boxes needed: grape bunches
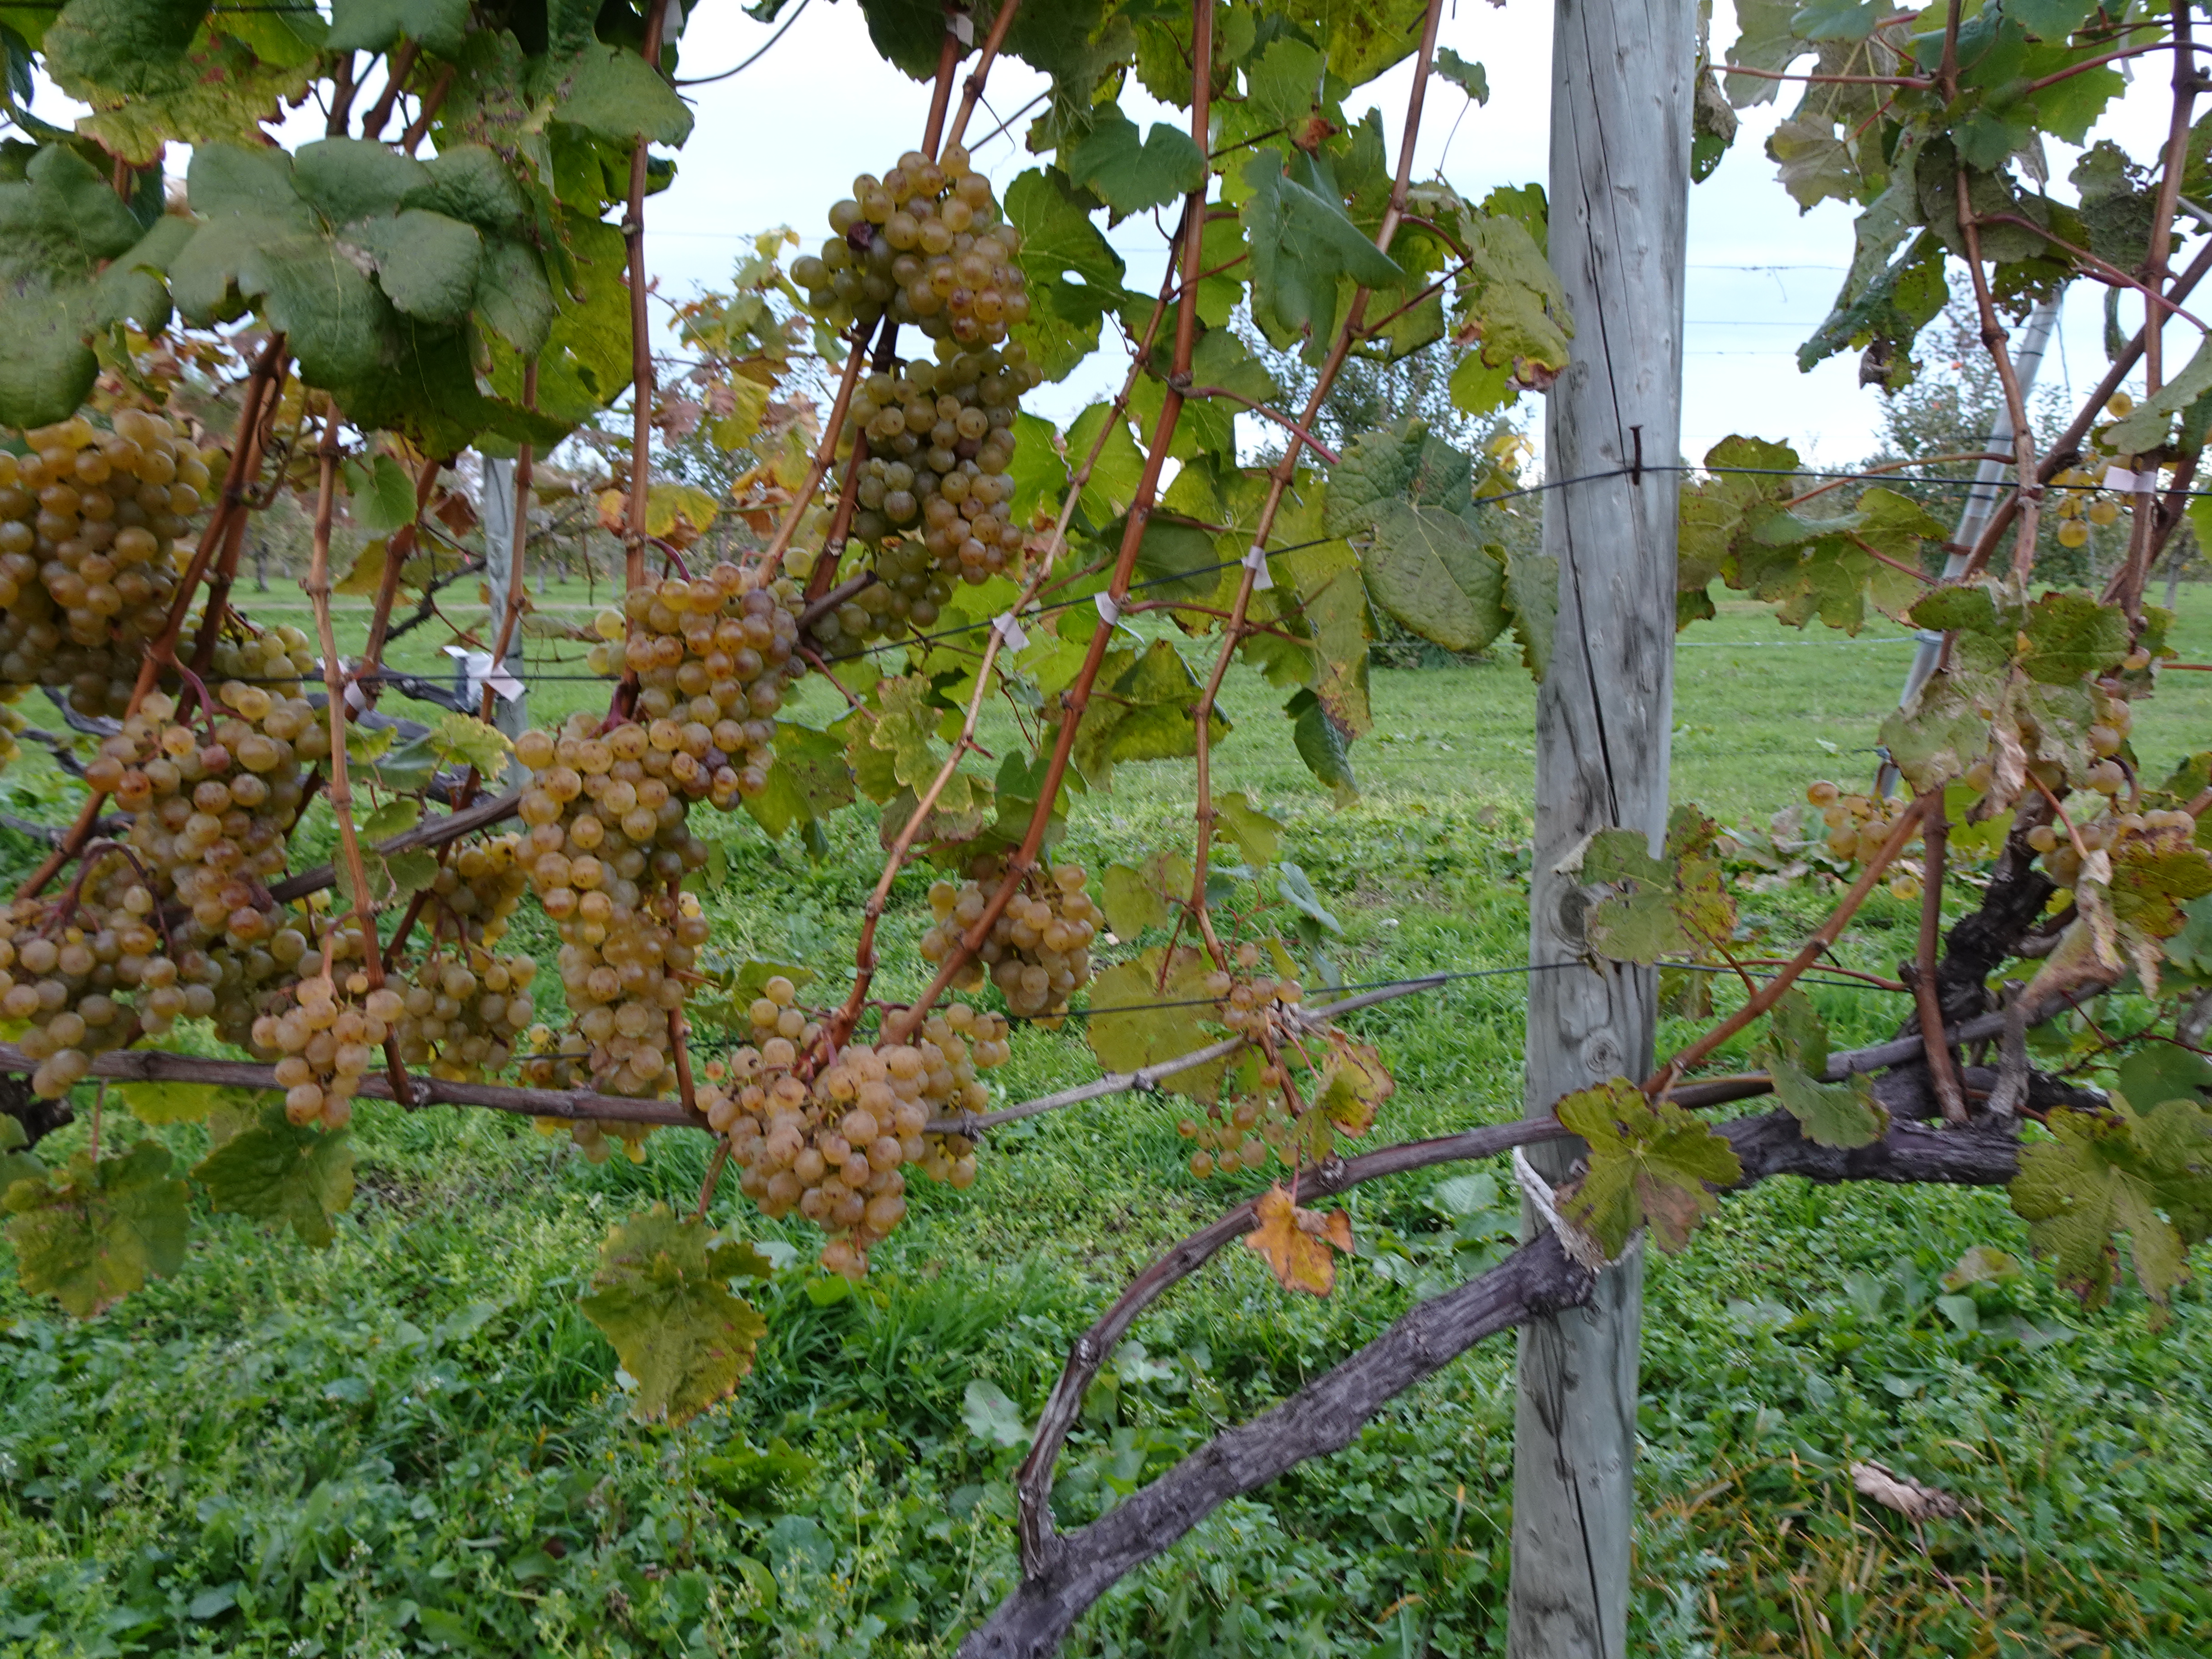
[388,954,537,1095]
[585,559,812,813]
[812,347,1044,589]
[2020,805,2212,939]
[780,139,1031,367]
[507,703,716,1006]
[1927,642,2156,815]
[14,381,212,643]
[692,973,929,1282]
[919,841,1127,1036]
[1799,777,1928,903]
[785,542,962,669]
[410,831,528,952]
[1175,942,1310,1183]
[2042,386,2181,554]
[0,447,158,795]
[208,614,342,779]
[0,876,223,1103]
[880,999,1009,1196]
[250,915,408,1132]
[133,926,313,1042]
[80,679,335,955]
[514,1006,699,1168]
